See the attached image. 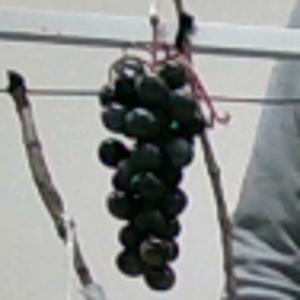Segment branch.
<instances>
[{
    "instance_id": "obj_2",
    "label": "branch",
    "mask_w": 300,
    "mask_h": 300,
    "mask_svg": "<svg viewBox=\"0 0 300 300\" xmlns=\"http://www.w3.org/2000/svg\"><path fill=\"white\" fill-rule=\"evenodd\" d=\"M201 145V151L204 155V163L207 166V173L210 176V183L214 192V200L217 207V220L219 223V235L223 245L222 267L225 277V283L221 294L224 299L234 300L238 297V282L234 274V249H233V224L227 214V203L225 202L224 191L220 180L221 169L215 161L211 141L208 139L206 124L204 132L198 137Z\"/></svg>"
},
{
    "instance_id": "obj_1",
    "label": "branch",
    "mask_w": 300,
    "mask_h": 300,
    "mask_svg": "<svg viewBox=\"0 0 300 300\" xmlns=\"http://www.w3.org/2000/svg\"><path fill=\"white\" fill-rule=\"evenodd\" d=\"M8 85L6 93L15 104V115L22 128V146L27 157V166L36 188L47 210L49 218L57 230L58 240L65 252L70 257L82 290L87 300H108L107 293L101 285H97L83 260L76 235V222L67 217V210L52 180L49 165L39 140L38 124L35 111L28 96L27 82L23 75L16 69H6Z\"/></svg>"
},
{
    "instance_id": "obj_3",
    "label": "branch",
    "mask_w": 300,
    "mask_h": 300,
    "mask_svg": "<svg viewBox=\"0 0 300 300\" xmlns=\"http://www.w3.org/2000/svg\"><path fill=\"white\" fill-rule=\"evenodd\" d=\"M175 35L174 49L177 57L183 60L189 71L188 87L193 98L198 100V84L193 65L194 37L200 28L195 25L196 16L187 11V6L182 0H173Z\"/></svg>"
}]
</instances>
